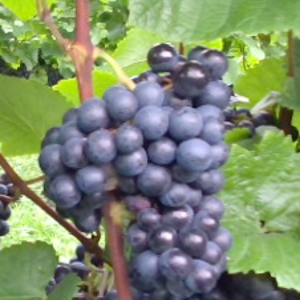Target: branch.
<instances>
[{
	"label": "branch",
	"instance_id": "branch-1",
	"mask_svg": "<svg viewBox=\"0 0 300 300\" xmlns=\"http://www.w3.org/2000/svg\"><path fill=\"white\" fill-rule=\"evenodd\" d=\"M90 0H76V40H70L59 32L49 12L46 0H37L36 9L43 23L63 44V48L75 62L79 82L80 100L85 102L93 97V74L95 63L93 59V44L90 40L89 26Z\"/></svg>",
	"mask_w": 300,
	"mask_h": 300
},
{
	"label": "branch",
	"instance_id": "branch-2",
	"mask_svg": "<svg viewBox=\"0 0 300 300\" xmlns=\"http://www.w3.org/2000/svg\"><path fill=\"white\" fill-rule=\"evenodd\" d=\"M108 202L101 208V213L106 222L108 233V244L112 253V260L115 271V284L118 298L120 300H133L127 271L126 259L124 256V248L121 235L124 234V229L120 225H114L113 219L110 217V209L113 207V202H118L119 198L116 195V190H108Z\"/></svg>",
	"mask_w": 300,
	"mask_h": 300
}]
</instances>
